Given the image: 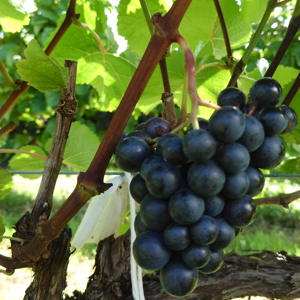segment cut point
Instances as JSON below:
<instances>
[{
	"label": "cut point",
	"mask_w": 300,
	"mask_h": 300,
	"mask_svg": "<svg viewBox=\"0 0 300 300\" xmlns=\"http://www.w3.org/2000/svg\"><path fill=\"white\" fill-rule=\"evenodd\" d=\"M172 41L177 43L184 51L188 68V93L191 100V113H189L188 121H190L198 116L199 95L196 91V61L190 46L178 30L173 32Z\"/></svg>",
	"instance_id": "1"
}]
</instances>
